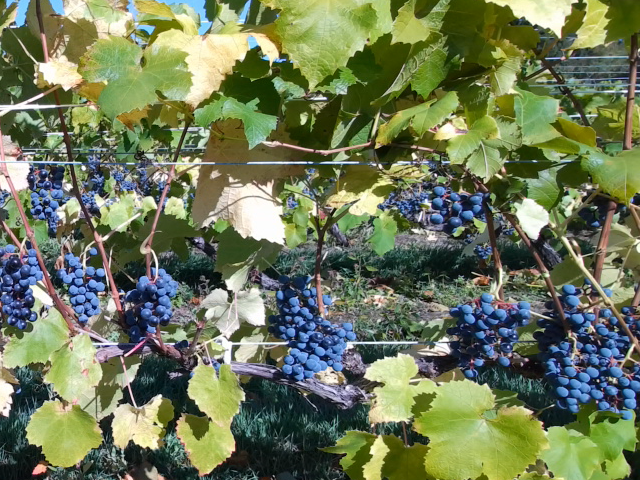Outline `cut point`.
Instances as JSON below:
<instances>
[{"mask_svg":"<svg viewBox=\"0 0 640 480\" xmlns=\"http://www.w3.org/2000/svg\"><path fill=\"white\" fill-rule=\"evenodd\" d=\"M151 253H152V256H153V260H154L155 267H156V268H159V264H158V257H157V255L155 254V250H154V249H152V248H151Z\"/></svg>","mask_w":640,"mask_h":480,"instance_id":"obj_2","label":"cut point"},{"mask_svg":"<svg viewBox=\"0 0 640 480\" xmlns=\"http://www.w3.org/2000/svg\"><path fill=\"white\" fill-rule=\"evenodd\" d=\"M498 274H499V282H498V284L496 286L494 294L499 293V289L502 288V268H501V266L498 267Z\"/></svg>","mask_w":640,"mask_h":480,"instance_id":"obj_1","label":"cut point"}]
</instances>
